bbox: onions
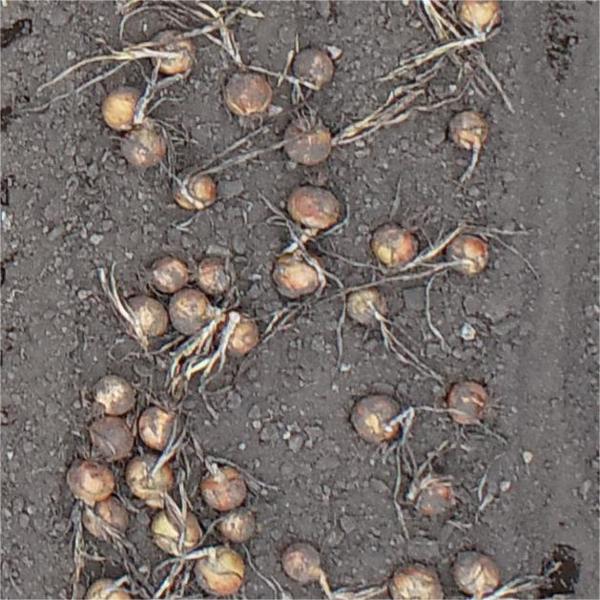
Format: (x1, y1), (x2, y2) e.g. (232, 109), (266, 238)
(283, 125), (331, 168)
(149, 256), (187, 295)
(120, 125), (167, 168)
(447, 236), (485, 275)
(224, 319), (258, 357)
(344, 287), (384, 326)
(129, 299), (169, 340)
(370, 224), (416, 269)
(451, 552), (496, 593)
(217, 507), (254, 542)
(457, 2), (499, 34)
(124, 455), (172, 500)
(154, 43), (192, 75)
(174, 171), (214, 209)
(99, 89), (138, 130)
(446, 380), (483, 425)
(222, 71), (269, 118)
(194, 258), (228, 297)
(84, 578), (130, 600)
(388, 564), (443, 600)
(197, 549), (244, 592)
(201, 464), (245, 511)
(273, 255), (320, 297)
(351, 392), (402, 444)
(282, 544), (323, 584)
(293, 50), (333, 89)
(86, 497), (128, 537)
(446, 110), (487, 150)
(411, 476), (453, 517)
(168, 289), (212, 334)
(67, 460), (112, 502)
(288, 185), (341, 232)
(138, 407), (175, 448)
(152, 511), (201, 558)
(91, 375), (133, 414)
(90, 418), (131, 458)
